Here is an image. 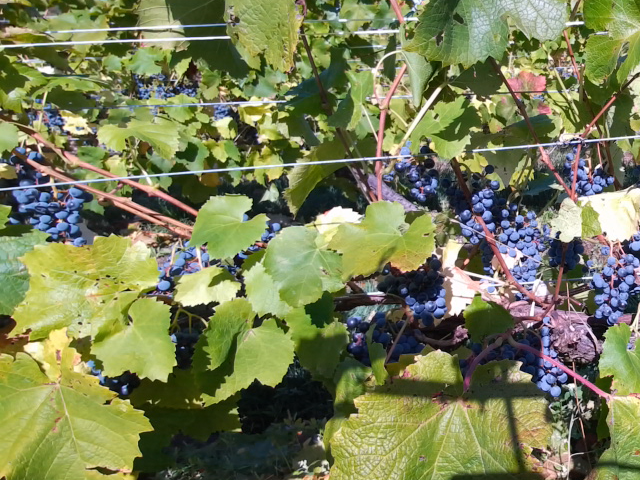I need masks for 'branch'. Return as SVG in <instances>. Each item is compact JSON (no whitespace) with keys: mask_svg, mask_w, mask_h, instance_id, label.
Masks as SVG:
<instances>
[{"mask_svg":"<svg viewBox=\"0 0 640 480\" xmlns=\"http://www.w3.org/2000/svg\"><path fill=\"white\" fill-rule=\"evenodd\" d=\"M302 40H303V44H304V49L308 58V62H309V66L311 69V72L313 73V76L315 78V81L317 82V85L319 86V91H320V95L322 97V100L324 101L325 104V109L326 112L328 113V118L332 119L333 118V110L330 107V102L329 99L326 95L325 89H324V84L322 83V80L320 79V76L318 74V71L316 69V66L314 64V60H313V56L309 47V42H308V37L306 35L302 36Z\"/></svg>","mask_w":640,"mask_h":480,"instance_id":"ca6c30ca","label":"branch"},{"mask_svg":"<svg viewBox=\"0 0 640 480\" xmlns=\"http://www.w3.org/2000/svg\"><path fill=\"white\" fill-rule=\"evenodd\" d=\"M336 131L338 133L339 140H340L342 146L345 149L346 154L348 155L349 158H353L354 154L351 152L350 147H349L347 141L344 138L342 128L341 127H337Z\"/></svg>","mask_w":640,"mask_h":480,"instance_id":"a944a4c4","label":"branch"},{"mask_svg":"<svg viewBox=\"0 0 640 480\" xmlns=\"http://www.w3.org/2000/svg\"><path fill=\"white\" fill-rule=\"evenodd\" d=\"M353 166L355 167V169L359 172L363 183L367 189V191L370 194V197L373 201H378V202H382L383 198H382V160H377V197L375 195L374 190L372 189L369 180L365 174V171L361 168V166L359 165V163L357 161L353 162Z\"/></svg>","mask_w":640,"mask_h":480,"instance_id":"1af6ec82","label":"branch"},{"mask_svg":"<svg viewBox=\"0 0 640 480\" xmlns=\"http://www.w3.org/2000/svg\"><path fill=\"white\" fill-rule=\"evenodd\" d=\"M75 188L86 190L93 192L99 196L107 198L109 201H113L116 205L127 212L141 216L142 218L149 219L151 223L158 227H164L179 233V235L183 238H194L195 233L193 232L194 226L188 225L180 220H177L173 217L168 216L167 214H163L161 212H156L147 206H143L134 202H130L124 198H119L110 195L105 191H101L95 187L84 185V184H74Z\"/></svg>","mask_w":640,"mask_h":480,"instance_id":"30e6481e","label":"branch"},{"mask_svg":"<svg viewBox=\"0 0 640 480\" xmlns=\"http://www.w3.org/2000/svg\"><path fill=\"white\" fill-rule=\"evenodd\" d=\"M11 153H12L13 155H16L18 158L22 159V160H23L24 162H26L27 164H29V165H31V166H33V167H36L37 169H39V170H41V171H43V172H45V173H47V174H50V175H52V176H55V177H57L58 179H61V180L65 181V182H72V181H75L73 178H69V177H67V176H65V175H63V174H61V173H60V172H58V171L52 170V169H50V168H47V167H45V166H43V165L39 164L38 162H36V161H34V160L29 159L28 157H26L25 155H23V154H21L20 152L16 151L15 149H12V150H11Z\"/></svg>","mask_w":640,"mask_h":480,"instance_id":"2b1400db","label":"branch"},{"mask_svg":"<svg viewBox=\"0 0 640 480\" xmlns=\"http://www.w3.org/2000/svg\"><path fill=\"white\" fill-rule=\"evenodd\" d=\"M18 128L21 131H25V132L29 133L31 136H34L35 138H38L39 141L49 145L52 149L56 150L69 163H72L74 165L80 166V167H82L84 169H87L88 171L100 174V175L105 176L107 178L120 177V176L115 175L113 173H109V172L104 171L102 169L90 166L89 164H86V163H84L82 161H79L77 159L71 158L69 155L66 154V152L61 147L56 145L54 142H52L48 138L43 137L40 133H37L36 131H33L31 128H29L27 126L19 124Z\"/></svg>","mask_w":640,"mask_h":480,"instance_id":"982ccf7c","label":"branch"},{"mask_svg":"<svg viewBox=\"0 0 640 480\" xmlns=\"http://www.w3.org/2000/svg\"><path fill=\"white\" fill-rule=\"evenodd\" d=\"M116 181L120 182L122 185H129L132 188L139 189V190H142L144 192H147V193H150L152 195H155L158 198H160L161 200L166 201V202H168V203H170L172 205H175L177 208H179L181 210L190 212L193 215H197L198 214V211L195 210L194 208H192L190 206H187V205H183L182 203L178 202L177 200H174V199L162 194L158 190H155L153 188L146 187L144 185L135 183V182H133L131 180H116Z\"/></svg>","mask_w":640,"mask_h":480,"instance_id":"1d269e1b","label":"branch"},{"mask_svg":"<svg viewBox=\"0 0 640 480\" xmlns=\"http://www.w3.org/2000/svg\"><path fill=\"white\" fill-rule=\"evenodd\" d=\"M562 42L564 45V48L566 49V52L569 56V62H570V68H571V72L575 78L576 84L580 85L581 84V78L579 76V73L577 72L576 66H575V60H574V54L573 51L568 43L567 40V30L563 29L562 30Z\"/></svg>","mask_w":640,"mask_h":480,"instance_id":"8bde2521","label":"branch"},{"mask_svg":"<svg viewBox=\"0 0 640 480\" xmlns=\"http://www.w3.org/2000/svg\"><path fill=\"white\" fill-rule=\"evenodd\" d=\"M639 76V72L635 71L631 76H629L628 78L625 79V81L617 88L615 89L610 96L608 97V99L603 103V105L598 109V111L595 114V109L593 107V104L591 102L589 93L587 90L583 91V96L584 99L586 101V104L588 106V109L590 111V121L588 122V124L585 126V130L583 132V134L580 136L581 140H585L586 137L588 136L589 132H590V128L594 125V128L596 130V134L599 137L603 136V132L601 131V128L599 126V122L597 121L599 119V117L602 115V113L605 111V109L611 104V102L614 100V98L621 92L623 91L626 86L633 81L636 77Z\"/></svg>","mask_w":640,"mask_h":480,"instance_id":"170604dd","label":"branch"},{"mask_svg":"<svg viewBox=\"0 0 640 480\" xmlns=\"http://www.w3.org/2000/svg\"><path fill=\"white\" fill-rule=\"evenodd\" d=\"M404 71H405L404 67H400L398 69L394 79L391 81L384 95L383 102H380V125H379L378 136H377V157H382V139L384 138V116H385V112L388 111V101L396 84L400 80V77L402 76V73Z\"/></svg>","mask_w":640,"mask_h":480,"instance_id":"ea751061","label":"branch"},{"mask_svg":"<svg viewBox=\"0 0 640 480\" xmlns=\"http://www.w3.org/2000/svg\"><path fill=\"white\" fill-rule=\"evenodd\" d=\"M474 216L477 217L483 232L492 248V250L494 251V253L496 254L498 260L501 262L502 265V272L504 273V275L510 279V281L513 283V285L522 292L523 295H525L527 298L530 299V301L532 303L537 304L538 306H540L541 308H543V310L539 313V314H535V315H525V316H520V317H514L511 319L512 323H517V322H523V321H527V320H538L543 318L549 311V309L554 305L555 301L557 300L560 291L562 289V285H563V277H564V273H565V253H566V248H567V243L563 242L562 243V251L560 253V271H559V282L557 283V287L555 289V292L552 296V298L550 299V301L547 303V305L545 303H543L541 300L537 299L534 297L533 294H531L529 291H527L523 286H521L518 281L516 280V278L508 271L507 269V263L505 258L503 257L501 251L499 250V248L496 246L493 237L491 236V233L488 229V226L485 223V220L483 218V216L478 213L475 214Z\"/></svg>","mask_w":640,"mask_h":480,"instance_id":"325d2c04","label":"branch"},{"mask_svg":"<svg viewBox=\"0 0 640 480\" xmlns=\"http://www.w3.org/2000/svg\"><path fill=\"white\" fill-rule=\"evenodd\" d=\"M390 5L392 6V9H393L394 14H395L396 16H403V17H405L404 15H402V14L400 13V11H399V9H398V7H397V4H396V2H395V0H390Z\"/></svg>","mask_w":640,"mask_h":480,"instance_id":"afce2bb1","label":"branch"},{"mask_svg":"<svg viewBox=\"0 0 640 480\" xmlns=\"http://www.w3.org/2000/svg\"><path fill=\"white\" fill-rule=\"evenodd\" d=\"M489 61L492 63L493 68L498 76V78L504 83V85L509 89L510 94L512 95L513 99L515 100L517 106L520 108V110L523 113V118L528 126V130H529V135L531 136V138L533 139L534 143H539V138L537 137L536 133L534 132V127H533V123L531 121V119L528 116V111L526 109V107L524 106V104L521 102L520 98L518 97L517 93L514 90V87L510 84L509 80L502 74L500 67L498 66L497 61L495 60L493 55L489 56Z\"/></svg>","mask_w":640,"mask_h":480,"instance_id":"1ff4a987","label":"branch"},{"mask_svg":"<svg viewBox=\"0 0 640 480\" xmlns=\"http://www.w3.org/2000/svg\"><path fill=\"white\" fill-rule=\"evenodd\" d=\"M581 148H582V144L581 143H578L576 145V147L574 148V156H573V161H572V169H571V175H570V187H569V185L566 183V181L558 173V171H557L555 165L553 164L552 160L550 159V157L545 153L543 147L542 146L538 147V152L544 158V160L547 162V164L550 167L553 175L556 177L557 181L564 187V189L566 191V194L572 200L576 199V196H575V177H576L577 163L579 161V155H580V152H581Z\"/></svg>","mask_w":640,"mask_h":480,"instance_id":"45aa463d","label":"branch"}]
</instances>
